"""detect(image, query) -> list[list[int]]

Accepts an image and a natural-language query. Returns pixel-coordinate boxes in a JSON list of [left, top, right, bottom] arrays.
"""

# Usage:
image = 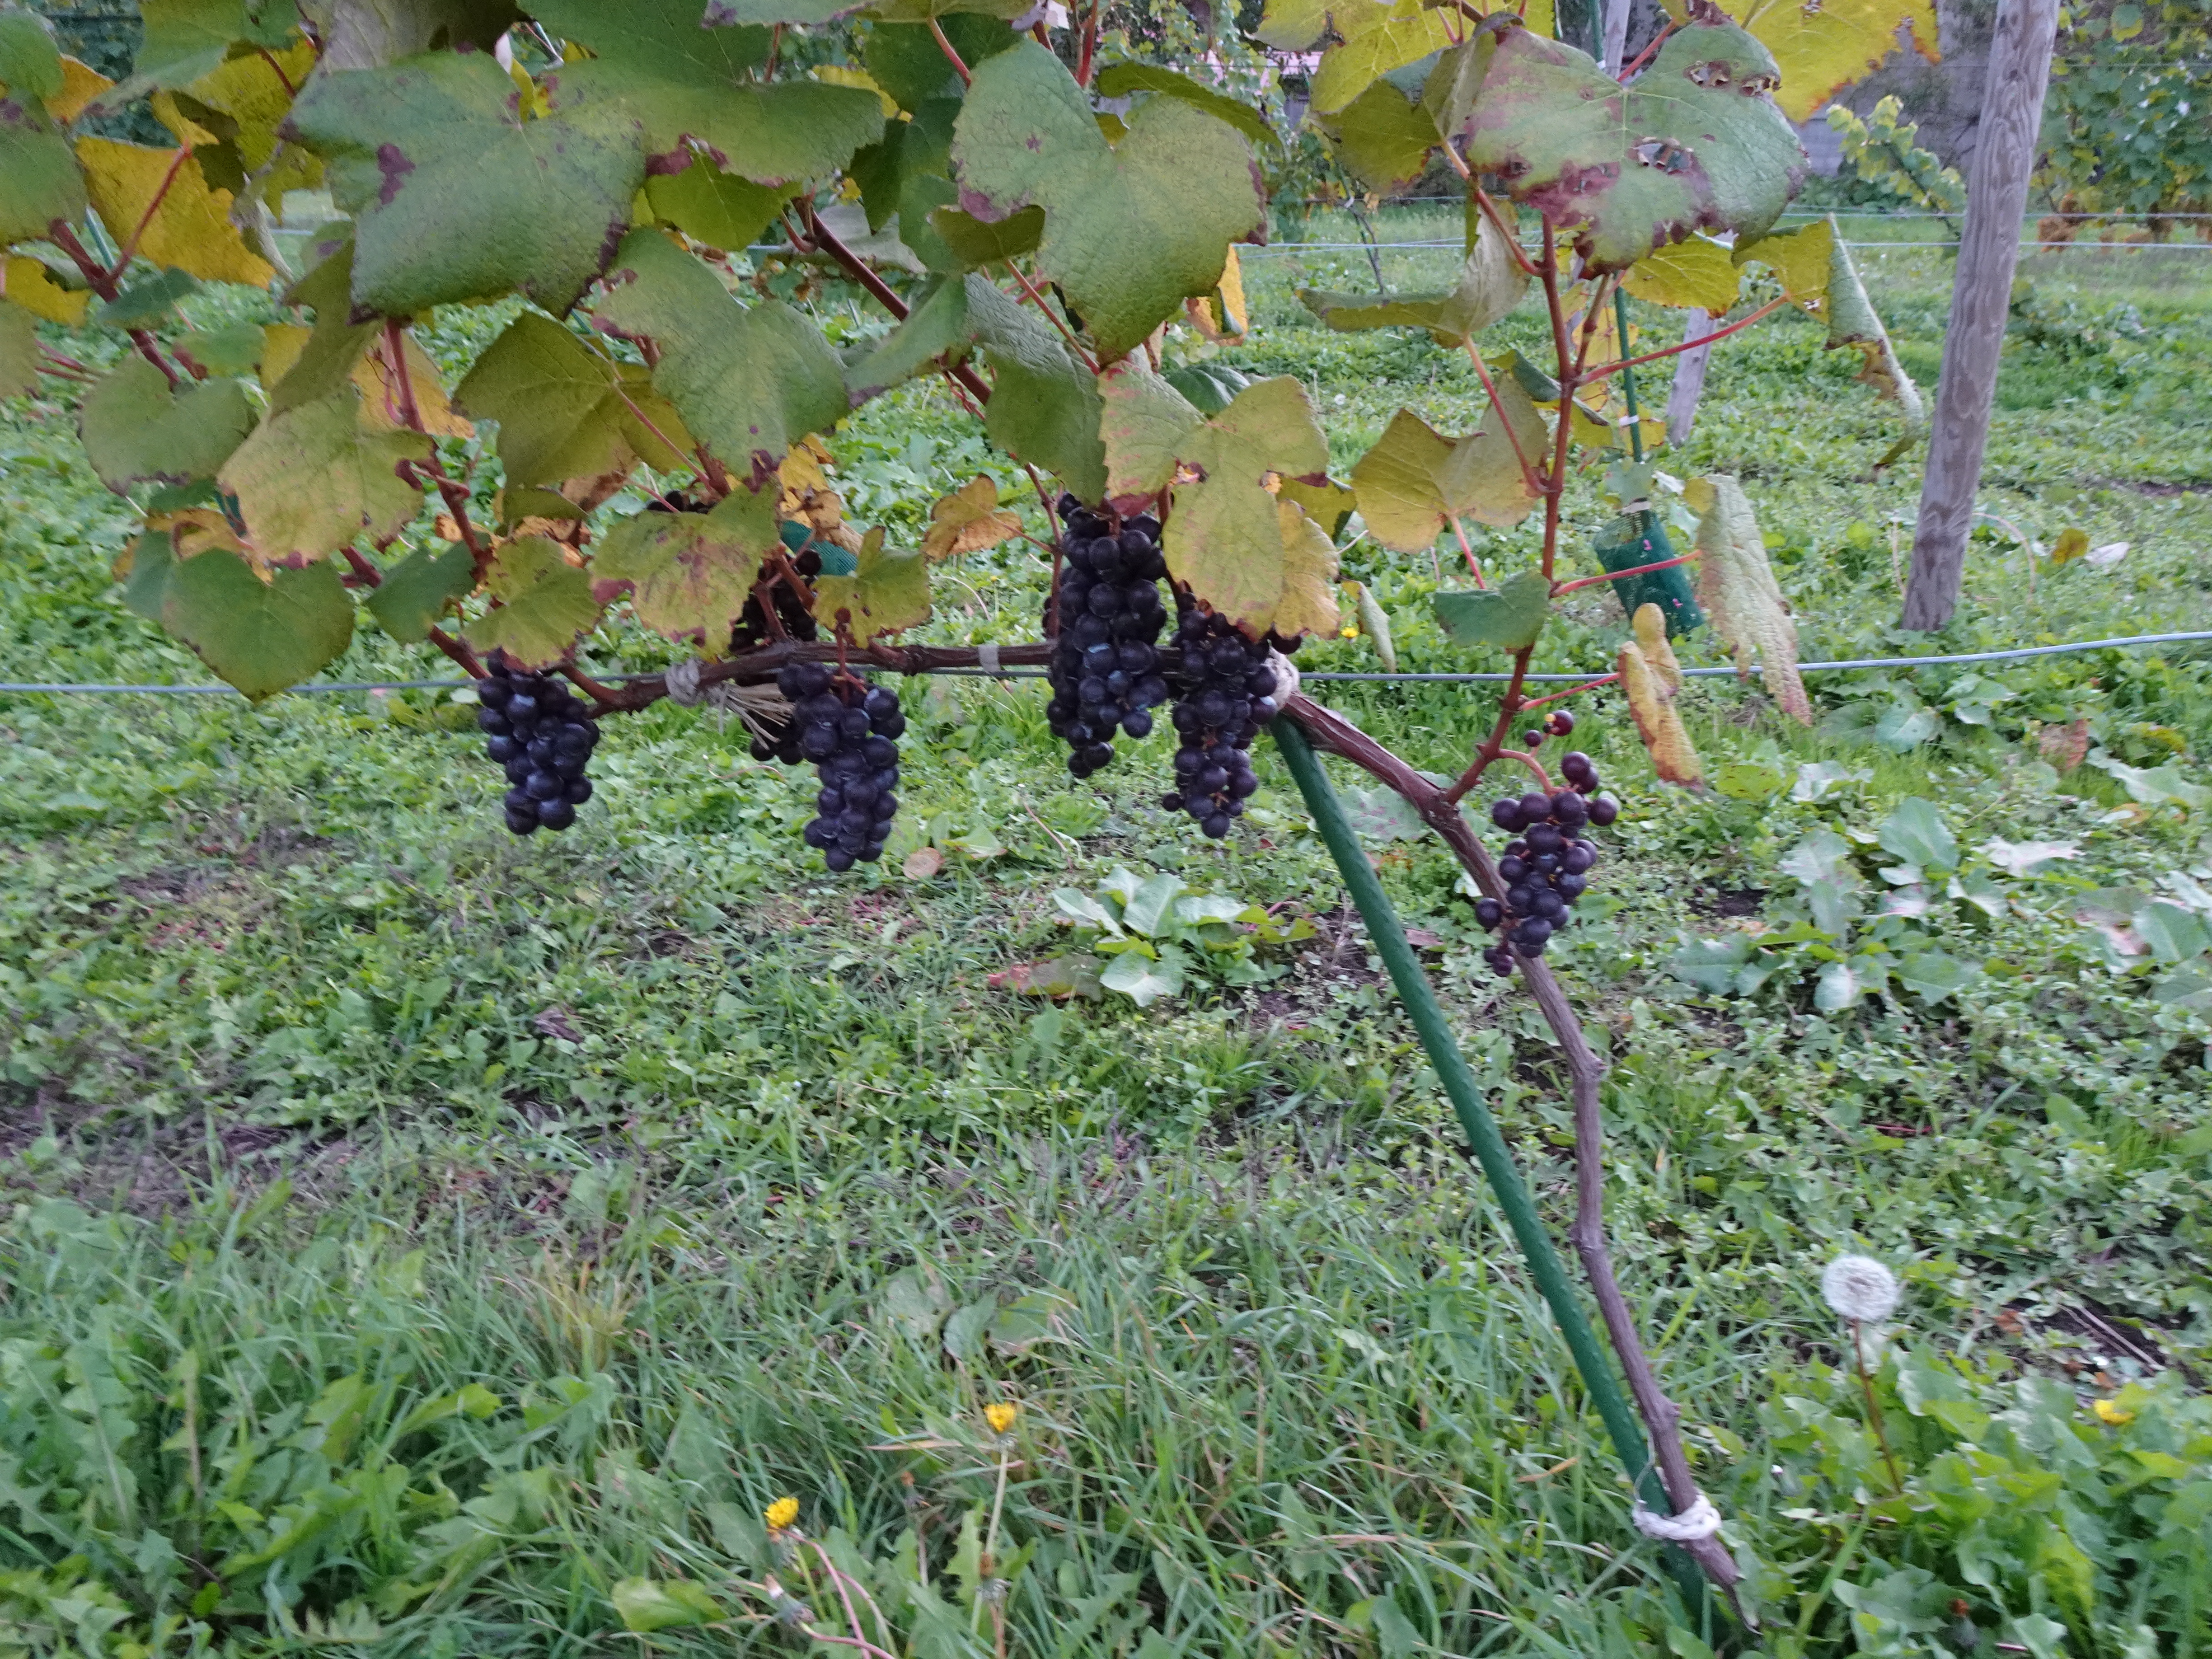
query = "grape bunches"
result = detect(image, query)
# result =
[[727, 549, 823, 765], [476, 647, 601, 836], [1040, 493, 1167, 780], [647, 491, 716, 515], [1475, 709, 1616, 976], [1162, 592, 1301, 839], [778, 662, 905, 872]]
